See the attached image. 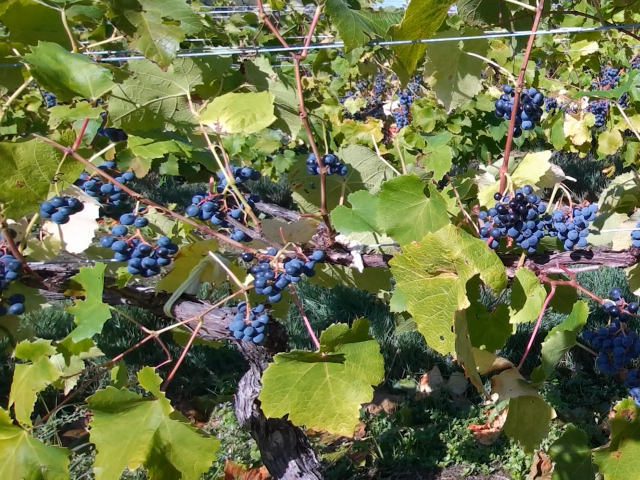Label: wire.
I'll use <instances>...</instances> for the list:
<instances>
[{
	"label": "wire",
	"mask_w": 640,
	"mask_h": 480,
	"mask_svg": "<svg viewBox=\"0 0 640 480\" xmlns=\"http://www.w3.org/2000/svg\"><path fill=\"white\" fill-rule=\"evenodd\" d=\"M629 30L640 29V24H626V25H610V26H587V27H575V28H545L531 31H513L512 28L502 29H489L484 30V35H466L460 37H432L425 39H403V40H372L365 43L366 47L374 45H405V44H427L434 42H462L469 40H494L502 39L513 36H534L547 33H578V32H590V31H613V30Z\"/></svg>",
	"instance_id": "d2f4af69"
},
{
	"label": "wire",
	"mask_w": 640,
	"mask_h": 480,
	"mask_svg": "<svg viewBox=\"0 0 640 480\" xmlns=\"http://www.w3.org/2000/svg\"><path fill=\"white\" fill-rule=\"evenodd\" d=\"M345 47L344 43L337 45H301L295 47H267L261 49H224V50H210L206 52H186L177 53V58L188 57H208L213 55H227V54H263L267 52H297L303 50H339Z\"/></svg>",
	"instance_id": "a73af890"
},
{
	"label": "wire",
	"mask_w": 640,
	"mask_h": 480,
	"mask_svg": "<svg viewBox=\"0 0 640 480\" xmlns=\"http://www.w3.org/2000/svg\"><path fill=\"white\" fill-rule=\"evenodd\" d=\"M81 262H108V263H115L116 259L115 258H110V257H92V258H77V259H69V260H62V261H27L26 265L27 266H31V265H35V266H63V265H67V264H77V263H81Z\"/></svg>",
	"instance_id": "4f2155b8"
},
{
	"label": "wire",
	"mask_w": 640,
	"mask_h": 480,
	"mask_svg": "<svg viewBox=\"0 0 640 480\" xmlns=\"http://www.w3.org/2000/svg\"><path fill=\"white\" fill-rule=\"evenodd\" d=\"M144 61V55H138L133 57H114V58H95V63H116V62H135V61Z\"/></svg>",
	"instance_id": "f0478fcc"
},
{
	"label": "wire",
	"mask_w": 640,
	"mask_h": 480,
	"mask_svg": "<svg viewBox=\"0 0 640 480\" xmlns=\"http://www.w3.org/2000/svg\"><path fill=\"white\" fill-rule=\"evenodd\" d=\"M623 231L640 232V227H636V226H621V227H613V228H595V229H591L590 233L591 234L615 233V232H623Z\"/></svg>",
	"instance_id": "a009ed1b"
}]
</instances>
